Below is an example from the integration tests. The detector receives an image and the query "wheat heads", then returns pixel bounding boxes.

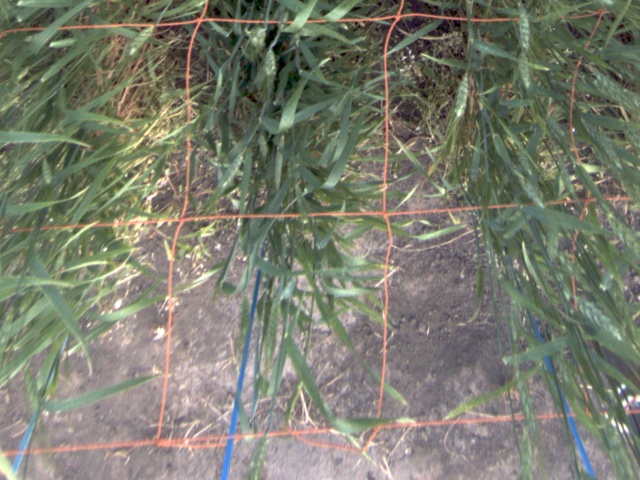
[619,116,640,150]
[518,9,531,53]
[609,214,639,258]
[216,156,243,186]
[590,63,629,106]
[572,297,624,340]
[126,29,157,55]
[263,50,276,75]
[516,177,543,210]
[518,55,531,87]
[50,36,76,45]
[583,120,617,171]
[41,158,54,183]
[452,78,473,115]
[247,29,267,45]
